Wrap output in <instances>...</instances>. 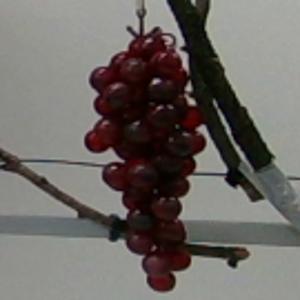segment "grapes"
I'll use <instances>...</instances> for the list:
<instances>
[{
    "label": "grapes",
    "instance_id": "grapes-1",
    "mask_svg": "<svg viewBox=\"0 0 300 300\" xmlns=\"http://www.w3.org/2000/svg\"><path fill=\"white\" fill-rule=\"evenodd\" d=\"M190 75L175 49L155 36H137L109 66L92 70L89 83L99 94L94 108L102 117L87 131L88 151L111 149L125 162L105 166L106 186L122 192L129 211L125 245L142 255L141 267L151 289L166 293L175 273L189 269L187 227L179 218L206 138L198 128L205 119L201 105L187 102L183 89Z\"/></svg>",
    "mask_w": 300,
    "mask_h": 300
}]
</instances>
